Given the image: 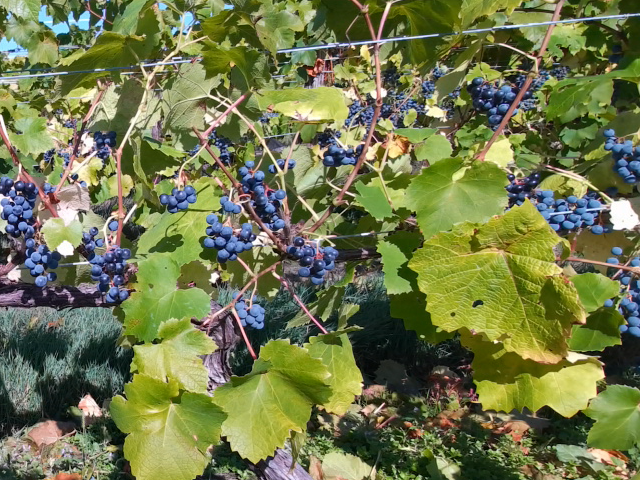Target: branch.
Segmentation results:
<instances>
[{"instance_id":"branch-1","label":"branch","mask_w":640,"mask_h":480,"mask_svg":"<svg viewBox=\"0 0 640 480\" xmlns=\"http://www.w3.org/2000/svg\"><path fill=\"white\" fill-rule=\"evenodd\" d=\"M379 44H375L373 45V52H374V59H375V92H376V99H375V110L373 113V117L371 119L370 122V126L368 128L367 131V137H366V143L363 147V150L361 151L357 161L355 162L351 174L348 178V180L345 182V184L343 185V187L341 188V191L338 193V195L335 197V199L333 200V202L331 203L330 207L328 208V210L320 217L318 218L312 225V227L310 228L311 232H314L317 227L323 222L325 221L334 211L335 207L337 206L338 202L341 200V198L345 195L348 187L352 184V182L354 181V178L357 174V171L361 165V163L363 162L366 153L368 152L370 145H371V140H372V133L374 130V126L376 125L377 119H378V115L381 109V103H382V96H381V74H380V57H379Z\"/></svg>"},{"instance_id":"branch-2","label":"branch","mask_w":640,"mask_h":480,"mask_svg":"<svg viewBox=\"0 0 640 480\" xmlns=\"http://www.w3.org/2000/svg\"><path fill=\"white\" fill-rule=\"evenodd\" d=\"M161 68V66H157V67H153L151 69V71L148 73V75L146 76V79L144 81V90L142 92L140 101H139V105H138V109L137 112L134 114L128 129L123 137V139L120 141V144L117 148L116 151V171H117V178H118V195H117V208H118V225H117V230H116V243L120 244L121 243V233H122V228H123V206H122V197H123V175H122V168H121V153L122 150L125 147V144L127 143L129 137L131 136V133L133 131V128L138 120V118L142 115V111L144 108V104H145V100L147 98L148 95V91H149V83L151 81V78L153 77V75Z\"/></svg>"},{"instance_id":"branch-3","label":"branch","mask_w":640,"mask_h":480,"mask_svg":"<svg viewBox=\"0 0 640 480\" xmlns=\"http://www.w3.org/2000/svg\"><path fill=\"white\" fill-rule=\"evenodd\" d=\"M553 29H554V25L552 26H548V30H547V34L545 36L544 42L541 45L540 49L537 52V55L535 57L534 60V64L532 69L529 71L528 75H527V80L525 82V84L523 85V88L518 92L517 96L514 98L513 104L512 106L507 110V112L505 113L504 117L501 119V121L499 122V125L497 127V129L493 132V134L491 135V137L488 139L486 145L484 146L483 150H481L478 155H477V159L480 161H484L485 160V156L487 154V152L489 151V148L491 147L492 143L496 140V138L498 137L499 133L502 131L505 123L509 120L510 116L512 115V113L517 109L518 104L521 102V98L522 96L525 94V92L528 90L529 86L532 83L534 74L536 73V71L538 70V66H539V62L541 60V57L544 53V51L546 50L552 33H553Z\"/></svg>"},{"instance_id":"branch-4","label":"branch","mask_w":640,"mask_h":480,"mask_svg":"<svg viewBox=\"0 0 640 480\" xmlns=\"http://www.w3.org/2000/svg\"><path fill=\"white\" fill-rule=\"evenodd\" d=\"M111 84V81H107L106 85L101 89V91L99 92V94L97 95V97L95 98V100L93 101L92 105L90 106L88 112L84 115V120H83V124L81 126V129L78 133L76 142L74 144V148L73 151L68 159V165L66 168L65 173L63 174V176L61 177L60 181L58 182L57 186L55 187L54 190V194L58 195L60 190L62 189V186L64 185L65 181L67 180V178L69 177L72 167H73V162L75 160V157L77 156L83 135L87 129L88 123H89V119L88 117L90 116L91 112L93 111V109L95 108V105L97 104L98 100L101 98V96L103 95V93L106 91V89L109 87V85Z\"/></svg>"},{"instance_id":"branch-5","label":"branch","mask_w":640,"mask_h":480,"mask_svg":"<svg viewBox=\"0 0 640 480\" xmlns=\"http://www.w3.org/2000/svg\"><path fill=\"white\" fill-rule=\"evenodd\" d=\"M234 114H235L236 117H238L248 127V129L250 130V132L253 135V137L259 143L260 148L262 149V151L264 152L266 157L270 160L275 173L279 177L281 190L285 191L286 190V184H285L284 174L279 169L275 157L270 153L269 149L267 148V146L264 143V140L257 133V131L254 128L253 124L248 119H246V117L243 114H241L239 110H235Z\"/></svg>"},{"instance_id":"branch-6","label":"branch","mask_w":640,"mask_h":480,"mask_svg":"<svg viewBox=\"0 0 640 480\" xmlns=\"http://www.w3.org/2000/svg\"><path fill=\"white\" fill-rule=\"evenodd\" d=\"M192 131L199 137V140L202 142L204 148L210 153L213 161L215 162V164L226 173L227 178L230 180V182L236 186V191L239 194L243 193V189L241 188V184L236 183L235 182V178L232 176V174L225 168V165L219 160V158L217 157V154L215 153L214 149L209 145L208 143V139L200 132V130L196 127L192 128Z\"/></svg>"},{"instance_id":"branch-7","label":"branch","mask_w":640,"mask_h":480,"mask_svg":"<svg viewBox=\"0 0 640 480\" xmlns=\"http://www.w3.org/2000/svg\"><path fill=\"white\" fill-rule=\"evenodd\" d=\"M285 259H286V256L281 255L278 258V260H276L271 266L263 268L261 271L253 275L251 279L246 283V285L240 290V292L233 298V300L230 303V306L235 307L238 301L242 298V296L246 293V291L251 288V286L254 284V282L257 279H259L261 276L265 275L266 273L276 269Z\"/></svg>"},{"instance_id":"branch-8","label":"branch","mask_w":640,"mask_h":480,"mask_svg":"<svg viewBox=\"0 0 640 480\" xmlns=\"http://www.w3.org/2000/svg\"><path fill=\"white\" fill-rule=\"evenodd\" d=\"M564 260L565 261H579V262H586V263H590V264H597V265H602V266L608 267V268H617V269H622V270H626V271H630V272H634V273L640 274V269L639 268L628 266V265H624V264H620V263H610V262H607V261H604V260H600V259H593V258L582 257V256H565Z\"/></svg>"},{"instance_id":"branch-9","label":"branch","mask_w":640,"mask_h":480,"mask_svg":"<svg viewBox=\"0 0 640 480\" xmlns=\"http://www.w3.org/2000/svg\"><path fill=\"white\" fill-rule=\"evenodd\" d=\"M0 137L2 139V141L4 142L5 146H6V150L7 153L9 155V157L11 158V160L19 167L21 173L25 176V178L31 182L34 186L38 185V181L33 179L31 177V175L29 174V172L25 169L24 165L22 164V162L16 158V156L14 155L12 148H11V144L9 142V140L7 139L5 132H4V128L2 125H0Z\"/></svg>"},{"instance_id":"branch-10","label":"branch","mask_w":640,"mask_h":480,"mask_svg":"<svg viewBox=\"0 0 640 480\" xmlns=\"http://www.w3.org/2000/svg\"><path fill=\"white\" fill-rule=\"evenodd\" d=\"M241 200L243 202H246L247 198L245 196H242ZM245 207L249 211V213L252 215V217L258 222V224L261 226V228L264 229L271 236V238L279 246V248L281 250H284L285 249V245L283 244V242L278 238V236L275 234V232L264 223V221L256 213V211L253 209V207L250 205L249 202L245 203Z\"/></svg>"},{"instance_id":"branch-11","label":"branch","mask_w":640,"mask_h":480,"mask_svg":"<svg viewBox=\"0 0 640 480\" xmlns=\"http://www.w3.org/2000/svg\"><path fill=\"white\" fill-rule=\"evenodd\" d=\"M208 39H209L208 35H202L201 37H198V38H195V39H191V40L185 42L184 44H182L181 46H179L177 49H175L172 53H170L169 55H167L163 59H172L176 55L180 54L187 47H189V46H191L193 44H197V43L203 42V41L208 40Z\"/></svg>"},{"instance_id":"branch-12","label":"branch","mask_w":640,"mask_h":480,"mask_svg":"<svg viewBox=\"0 0 640 480\" xmlns=\"http://www.w3.org/2000/svg\"><path fill=\"white\" fill-rule=\"evenodd\" d=\"M352 3L363 11L367 26L370 29L371 40L377 39V37L375 36V27L373 26L368 8L364 4H362L359 0H352Z\"/></svg>"},{"instance_id":"branch-13","label":"branch","mask_w":640,"mask_h":480,"mask_svg":"<svg viewBox=\"0 0 640 480\" xmlns=\"http://www.w3.org/2000/svg\"><path fill=\"white\" fill-rule=\"evenodd\" d=\"M38 196L39 198L42 200V202L45 204V206L48 208V210L51 212V214L55 217L58 218L59 217V213L55 210V208L50 204L51 199L50 196L48 194H43V189L39 188L38 189Z\"/></svg>"},{"instance_id":"branch-14","label":"branch","mask_w":640,"mask_h":480,"mask_svg":"<svg viewBox=\"0 0 640 480\" xmlns=\"http://www.w3.org/2000/svg\"><path fill=\"white\" fill-rule=\"evenodd\" d=\"M562 9H563V1L559 0L558 3L556 4V8H555V11L553 13L552 20H557L558 19V17L560 16V14L562 12Z\"/></svg>"}]
</instances>
